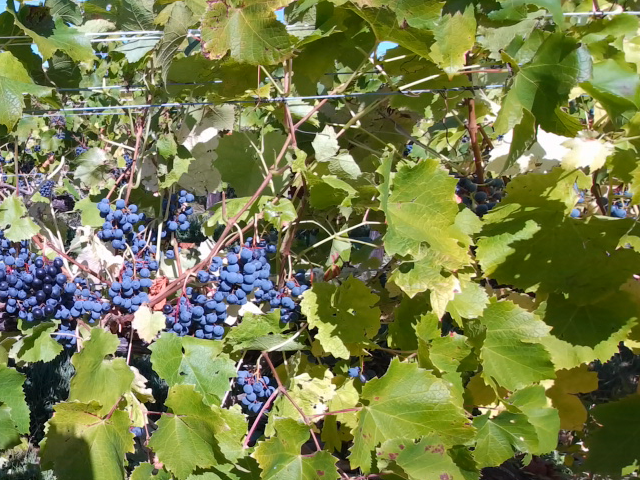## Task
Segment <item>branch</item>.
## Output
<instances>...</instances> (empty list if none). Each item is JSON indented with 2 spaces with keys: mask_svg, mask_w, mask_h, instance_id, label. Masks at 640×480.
Here are the masks:
<instances>
[{
  "mask_svg": "<svg viewBox=\"0 0 640 480\" xmlns=\"http://www.w3.org/2000/svg\"><path fill=\"white\" fill-rule=\"evenodd\" d=\"M148 112V108H143V110L141 111V115H140V120L138 122V126L137 129L135 131L136 137L134 139V148L132 150V154H131V159H130V165H129V181H128V185L126 187L125 190V201L129 202L130 201V193L133 187V183H134V168H135V162H136V157H137V153L139 151V142L141 139V136L143 134V125L145 122V118H146V114Z\"/></svg>",
  "mask_w": 640,
  "mask_h": 480,
  "instance_id": "branch-3",
  "label": "branch"
},
{
  "mask_svg": "<svg viewBox=\"0 0 640 480\" xmlns=\"http://www.w3.org/2000/svg\"><path fill=\"white\" fill-rule=\"evenodd\" d=\"M309 433H310L311 439L313 440V443H314V445H315V448H316L317 450H320V449H321V445H320V443H319V441H318V438H317V436H316V433H315V430H314V428H313V427H310V428H309Z\"/></svg>",
  "mask_w": 640,
  "mask_h": 480,
  "instance_id": "branch-12",
  "label": "branch"
},
{
  "mask_svg": "<svg viewBox=\"0 0 640 480\" xmlns=\"http://www.w3.org/2000/svg\"><path fill=\"white\" fill-rule=\"evenodd\" d=\"M295 182V178L291 177L287 184L284 186V188L280 191V193H278L274 199H273V204L277 205L278 201L287 193V191L289 190V188L292 187V184Z\"/></svg>",
  "mask_w": 640,
  "mask_h": 480,
  "instance_id": "branch-11",
  "label": "branch"
},
{
  "mask_svg": "<svg viewBox=\"0 0 640 480\" xmlns=\"http://www.w3.org/2000/svg\"><path fill=\"white\" fill-rule=\"evenodd\" d=\"M417 55L416 51H412V52H408V53H402V54H397V55H392L389 56L385 59L379 60L378 62H374L371 65H368L367 67L363 68L362 70L358 71L356 74H354L353 76H351L350 78H348L347 80H345L343 83H341L340 85L336 86L332 91L331 94H337L340 90H342L343 88L347 87L349 84H351L352 82H354L355 80H357L358 78H360L361 76H363L364 74H366L367 72L380 67L382 65H385L391 61L394 60H399V59H405V58H410V57H415Z\"/></svg>",
  "mask_w": 640,
  "mask_h": 480,
  "instance_id": "branch-4",
  "label": "branch"
},
{
  "mask_svg": "<svg viewBox=\"0 0 640 480\" xmlns=\"http://www.w3.org/2000/svg\"><path fill=\"white\" fill-rule=\"evenodd\" d=\"M305 204H306V200L302 199L300 201L299 205H298L297 214H296L293 226L291 227V229L288 232L287 243H286L284 252L282 254L281 263H280V267H279V274H278V290L279 291L283 290V276H284V270H285L287 256L289 255V251H290L291 245H292L293 235H294L296 229L299 226V223H300V220H301V217H302L303 208H304Z\"/></svg>",
  "mask_w": 640,
  "mask_h": 480,
  "instance_id": "branch-6",
  "label": "branch"
},
{
  "mask_svg": "<svg viewBox=\"0 0 640 480\" xmlns=\"http://www.w3.org/2000/svg\"><path fill=\"white\" fill-rule=\"evenodd\" d=\"M465 58H466L465 65H462L459 68V72L460 73H463L464 71H471L473 68L485 67V66L494 65V64H498V65H502L503 64V61L501 59H492V60H487V61H483V62L471 63V54L470 53H466L465 54Z\"/></svg>",
  "mask_w": 640,
  "mask_h": 480,
  "instance_id": "branch-9",
  "label": "branch"
},
{
  "mask_svg": "<svg viewBox=\"0 0 640 480\" xmlns=\"http://www.w3.org/2000/svg\"><path fill=\"white\" fill-rule=\"evenodd\" d=\"M444 76H445L444 72H436V73H433V74H430V75H425V76L419 77L417 79L411 80L409 82H406V83L400 85L398 87V89H405V88L411 87L413 85L419 84L421 82H424V81H427V80H432V79H435V78H438V77H444Z\"/></svg>",
  "mask_w": 640,
  "mask_h": 480,
  "instance_id": "branch-10",
  "label": "branch"
},
{
  "mask_svg": "<svg viewBox=\"0 0 640 480\" xmlns=\"http://www.w3.org/2000/svg\"><path fill=\"white\" fill-rule=\"evenodd\" d=\"M37 238L40 239L41 241L44 242V244L52 249L53 251H55L57 254H59L62 258L66 259L67 261L71 262L74 266H76L77 268L81 269L82 271H87L90 274L96 276L97 278H99L102 282H104L106 285L110 284V280L106 277H104L101 273H99L98 271H96L95 269L91 268L90 266H88L87 264L81 262L78 259L73 258L72 256H70L69 254L65 253L63 250H61L59 247H57L55 244L51 243L49 241V239L47 238L46 234H41L38 233L37 234Z\"/></svg>",
  "mask_w": 640,
  "mask_h": 480,
  "instance_id": "branch-5",
  "label": "branch"
},
{
  "mask_svg": "<svg viewBox=\"0 0 640 480\" xmlns=\"http://www.w3.org/2000/svg\"><path fill=\"white\" fill-rule=\"evenodd\" d=\"M468 103H469V121H468V125L466 126V129L469 131L470 138L472 139L475 173L478 175V180L483 181L484 180L483 168L480 161V151H479L478 141H477V126L475 121V103L473 99H469Z\"/></svg>",
  "mask_w": 640,
  "mask_h": 480,
  "instance_id": "branch-2",
  "label": "branch"
},
{
  "mask_svg": "<svg viewBox=\"0 0 640 480\" xmlns=\"http://www.w3.org/2000/svg\"><path fill=\"white\" fill-rule=\"evenodd\" d=\"M261 356H262L263 360L267 363V365L270 367V369L272 371V374H273V376L275 378V381H276V383L278 385L279 392L290 400V402H291L293 408L296 410V412L305 421L306 425L310 426L311 425L310 419L302 411L301 407L296 402V399L287 390L284 389L283 382L281 381V378H280V376H279V374L277 372V369H276L275 365L273 364L272 360L267 356V353H266L265 350L261 351Z\"/></svg>",
  "mask_w": 640,
  "mask_h": 480,
  "instance_id": "branch-7",
  "label": "branch"
},
{
  "mask_svg": "<svg viewBox=\"0 0 640 480\" xmlns=\"http://www.w3.org/2000/svg\"><path fill=\"white\" fill-rule=\"evenodd\" d=\"M389 98V95H383L381 98L375 100L370 106H368L365 110L361 111L359 114H357L354 118L350 119L349 121H347L337 132L336 134V138L340 139L341 136L343 135V133L347 130L348 127H350L351 125L357 123L361 118H363L364 116H367L370 111H372L375 107H377L379 104L385 102L387 99Z\"/></svg>",
  "mask_w": 640,
  "mask_h": 480,
  "instance_id": "branch-8",
  "label": "branch"
},
{
  "mask_svg": "<svg viewBox=\"0 0 640 480\" xmlns=\"http://www.w3.org/2000/svg\"><path fill=\"white\" fill-rule=\"evenodd\" d=\"M328 103V100H321L316 106H314L312 109H310L309 111H307L304 115H302L299 120L296 122V124L293 125V127L291 128L287 138L285 139L283 145L280 147V150L276 156V159L271 167V169L269 170V172L267 173V175L262 179L258 190L255 192V194L249 199L248 202H246L242 208L239 210V212L237 214H235L234 216H232L229 219V223L227 225V228L225 229L224 232H222L219 237L217 238L216 242L214 243L213 247H212V251L206 256V258L199 262L198 264L194 265L188 272H185L183 274L182 271V267H181V262H180V255H179V242L177 240L176 237H174V232H171V239H169L170 242V246L172 248H174V253H175V259H176V264H177V273L179 278H177L176 280H174L172 283H170L169 285H167L163 290H161L160 292H158L156 295H154L151 298V303L148 304L149 308H153L154 306H156L159 302L164 301L165 299H167L168 297H170L171 295H173L177 290L181 289L184 287V284L181 283L183 282L186 278H188L187 283L191 284L195 277L198 275V273L204 269L207 264L211 261V259L213 258V256L215 255V252H222L223 250H225L230 244H232L233 242H235L236 240H238L241 237L240 233H236L234 236L230 237L228 240H226L222 245L221 242L222 240L230 234L232 227L236 224V221L241 218L243 216V214L246 212V210L258 199V197L263 193L264 191V187L266 185V183L271 179L272 175L275 173L276 169L278 168V165L282 159L283 154L285 153L286 148L289 146L295 132L297 129L300 128V126L303 124V122L309 118L311 115H313L315 112H317L318 110H320L325 104Z\"/></svg>",
  "mask_w": 640,
  "mask_h": 480,
  "instance_id": "branch-1",
  "label": "branch"
}]
</instances>
